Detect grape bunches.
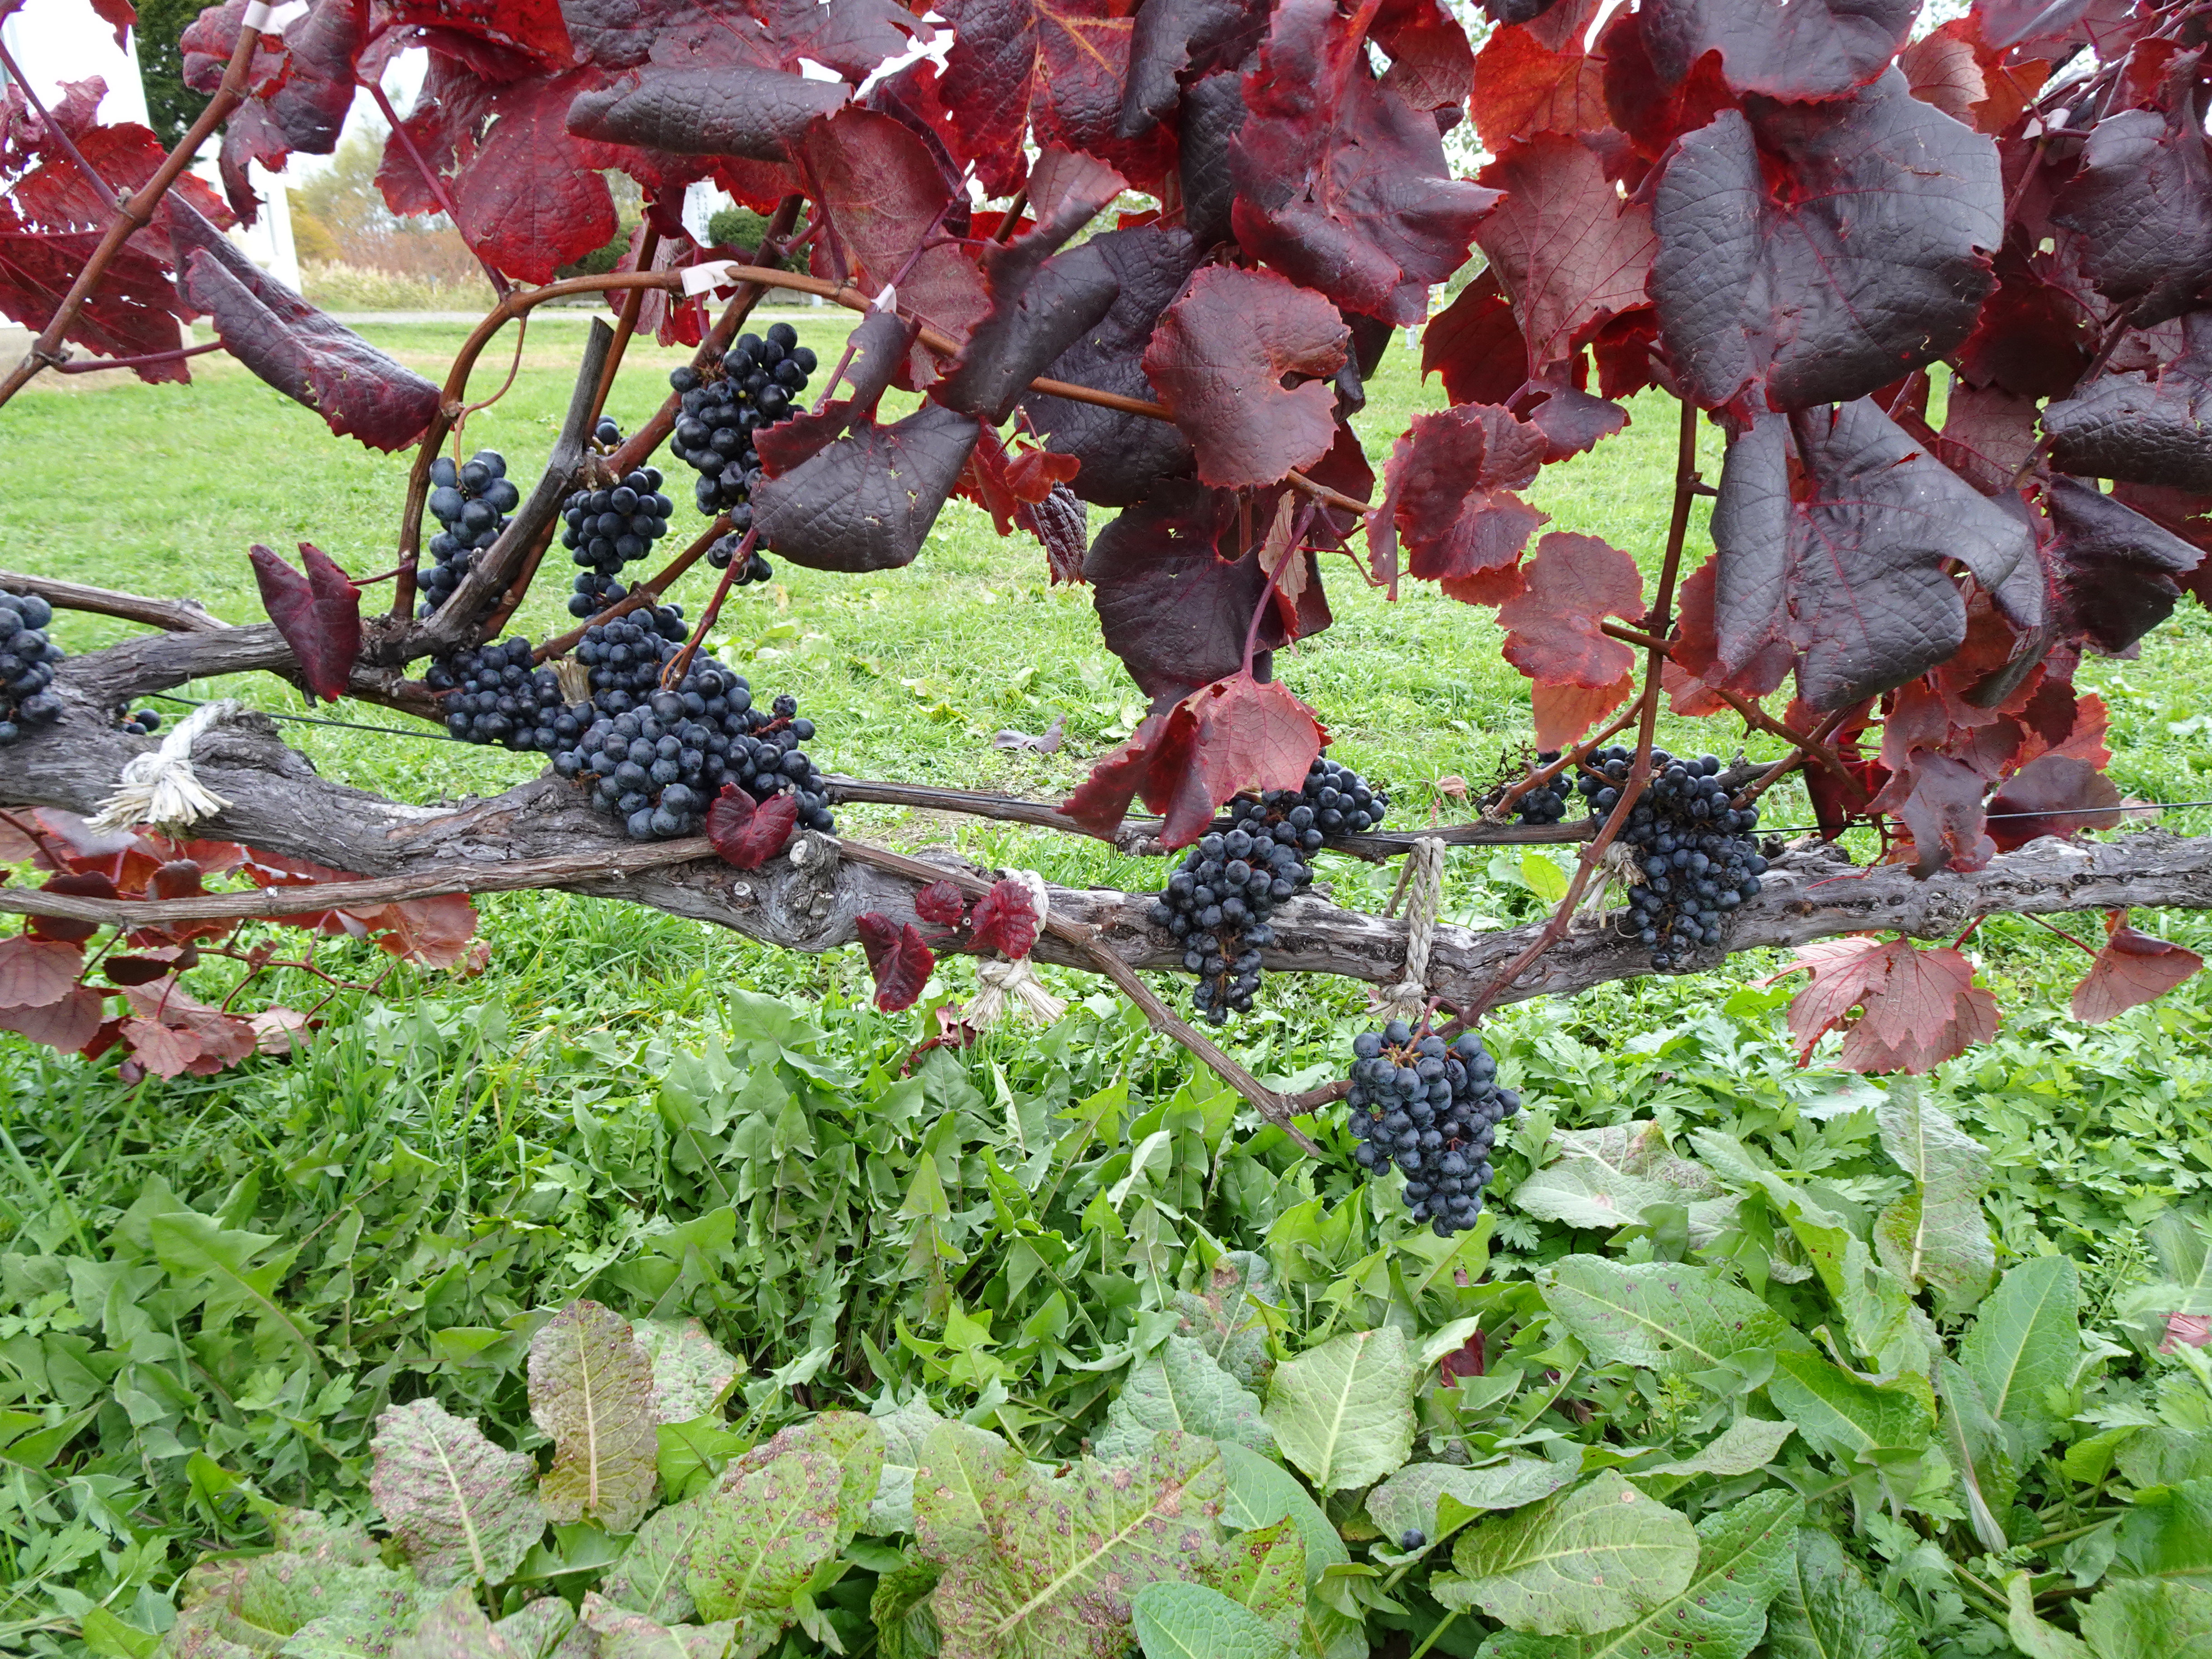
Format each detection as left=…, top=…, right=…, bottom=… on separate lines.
left=1347, top=1019, right=1524, bottom=1241
left=1395, top=1522, right=1438, bottom=1558
left=550, top=686, right=838, bottom=842
left=408, top=447, right=517, bottom=627
left=1467, top=739, right=1573, bottom=832
left=0, top=584, right=65, bottom=746
left=1141, top=830, right=1325, bottom=1030
left=1231, top=752, right=1391, bottom=849
left=670, top=325, right=822, bottom=587
left=1578, top=734, right=1791, bottom=972
left=419, top=634, right=595, bottom=762
left=568, top=604, right=755, bottom=733
left=556, top=412, right=673, bottom=621
left=108, top=695, right=169, bottom=739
